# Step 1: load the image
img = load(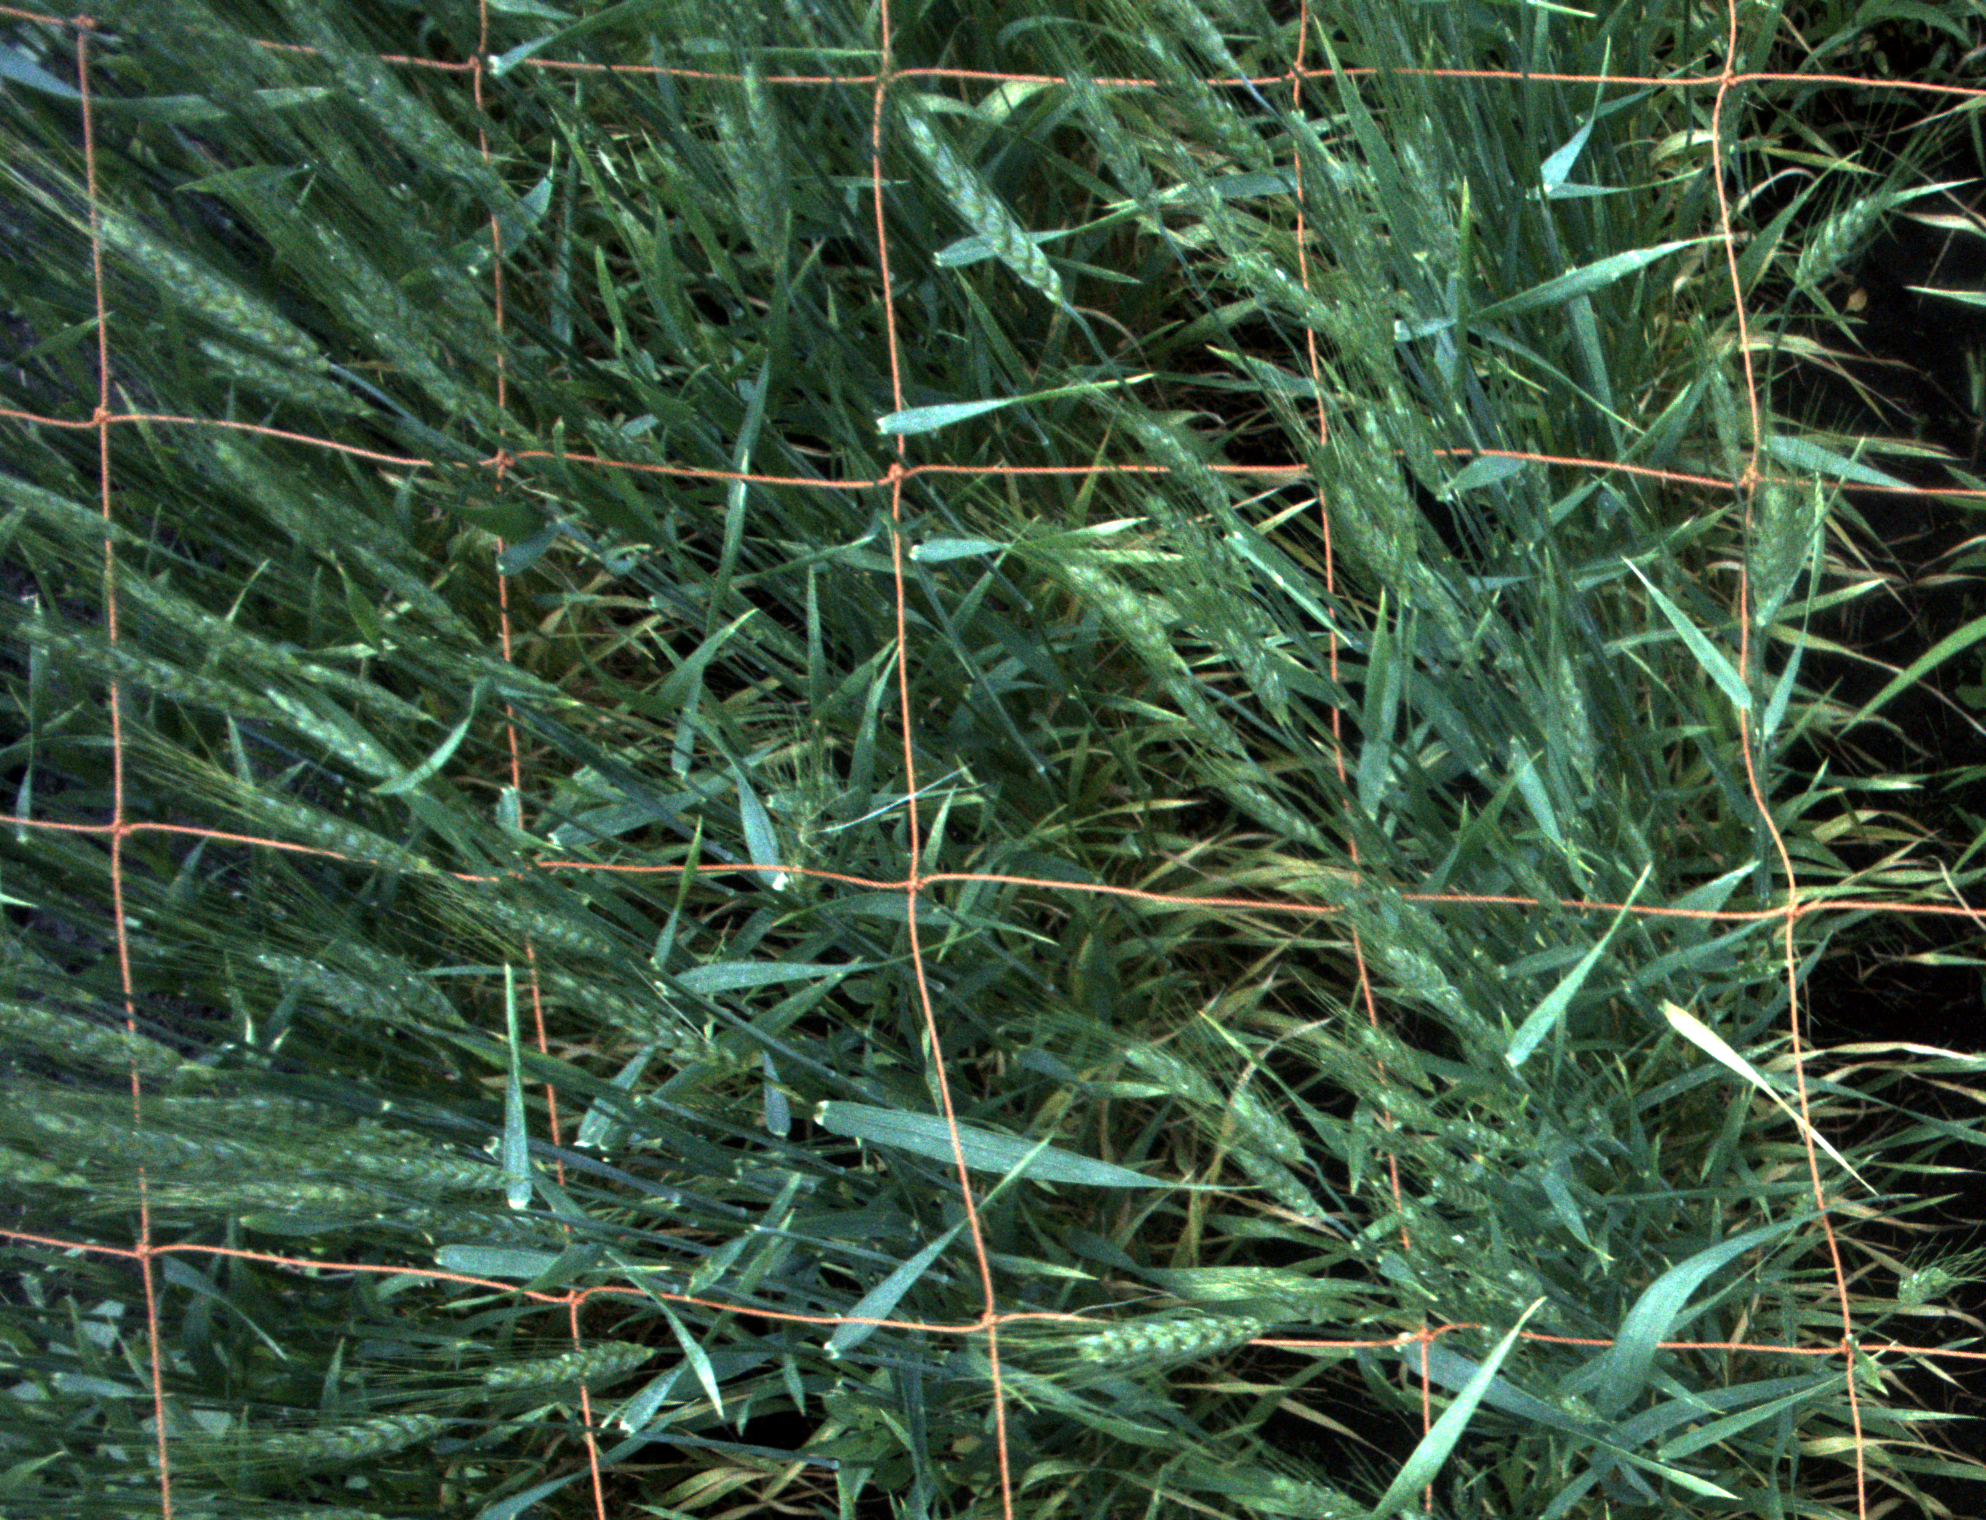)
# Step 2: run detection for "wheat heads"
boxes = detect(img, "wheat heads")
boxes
[254,946,418,1028]
[1167,680,1249,757]
[1377,884,1453,956]
[1386,382,1445,489]
[263,1409,451,1472]
[2,925,78,997]
[1405,1240,1457,1295]
[1230,1085,1311,1165]
[0,470,129,549]
[552,979,757,1089]
[219,1500,395,1520]
[1126,1049,1222,1106]
[1058,561,1176,673]
[1334,482,1416,596]
[468,389,545,450]
[1123,409,1230,514]
[428,650,580,713]
[613,197,665,280]
[150,1176,395,1218]
[782,798,825,908]
[484,1336,660,1395]
[1382,950,1496,1039]
[655,158,734,227]
[99,220,323,362]
[1418,109,1439,183]
[352,544,472,643]
[1222,629,1292,721]
[1235,1140,1328,1225]
[1894,1267,1952,1309]
[0,1000,212,1089]
[1245,1284,1335,1327]
[711,109,784,260]
[1234,258,1352,349]
[1446,1116,1517,1150]
[119,572,297,681]
[1358,407,1415,535]
[1077,1311,1262,1361]
[1273,1474,1371,1520]
[350,1155,510,1192]
[1397,143,1463,270]
[190,332,348,422]
[303,222,442,363]
[214,436,341,563]
[1067,76,1159,243]
[1710,371,1740,472]
[35,1105,327,1185]
[221,776,444,880]
[300,3,524,214]
[113,7,297,164]
[17,625,294,724]
[1354,225,1396,380]
[1416,1143,1460,1167]
[261,692,414,791]
[896,99,1063,296]
[1165,135,1244,263]
[1431,1174,1492,1213]
[1372,1086,1441,1126]
[486,896,620,964]
[1146,487,1249,587]
[1518,435,1553,517]
[1754,490,1804,608]
[1625,819,1658,876]
[1220,781,1335,856]
[421,1204,566,1246]
[1193,581,1280,636]
[1558,648,1599,796]
[1169,0,1224,63]
[1562,1393,1607,1432]
[1416,560,1478,668]
[1793,191,1889,292]
[585,412,672,476]
[1404,1200,1469,1260]
[169,0,300,92]
[1511,862,1565,915]
[333,296,470,417]
[1359,1019,1433,1085]
[313,490,439,563]
[1498,651,1555,741]
[1136,30,1271,171]
[143,1091,385,1145]
[738,49,794,201]
[343,934,472,1026]
[1794,1177,1841,1220]
[291,661,442,727]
